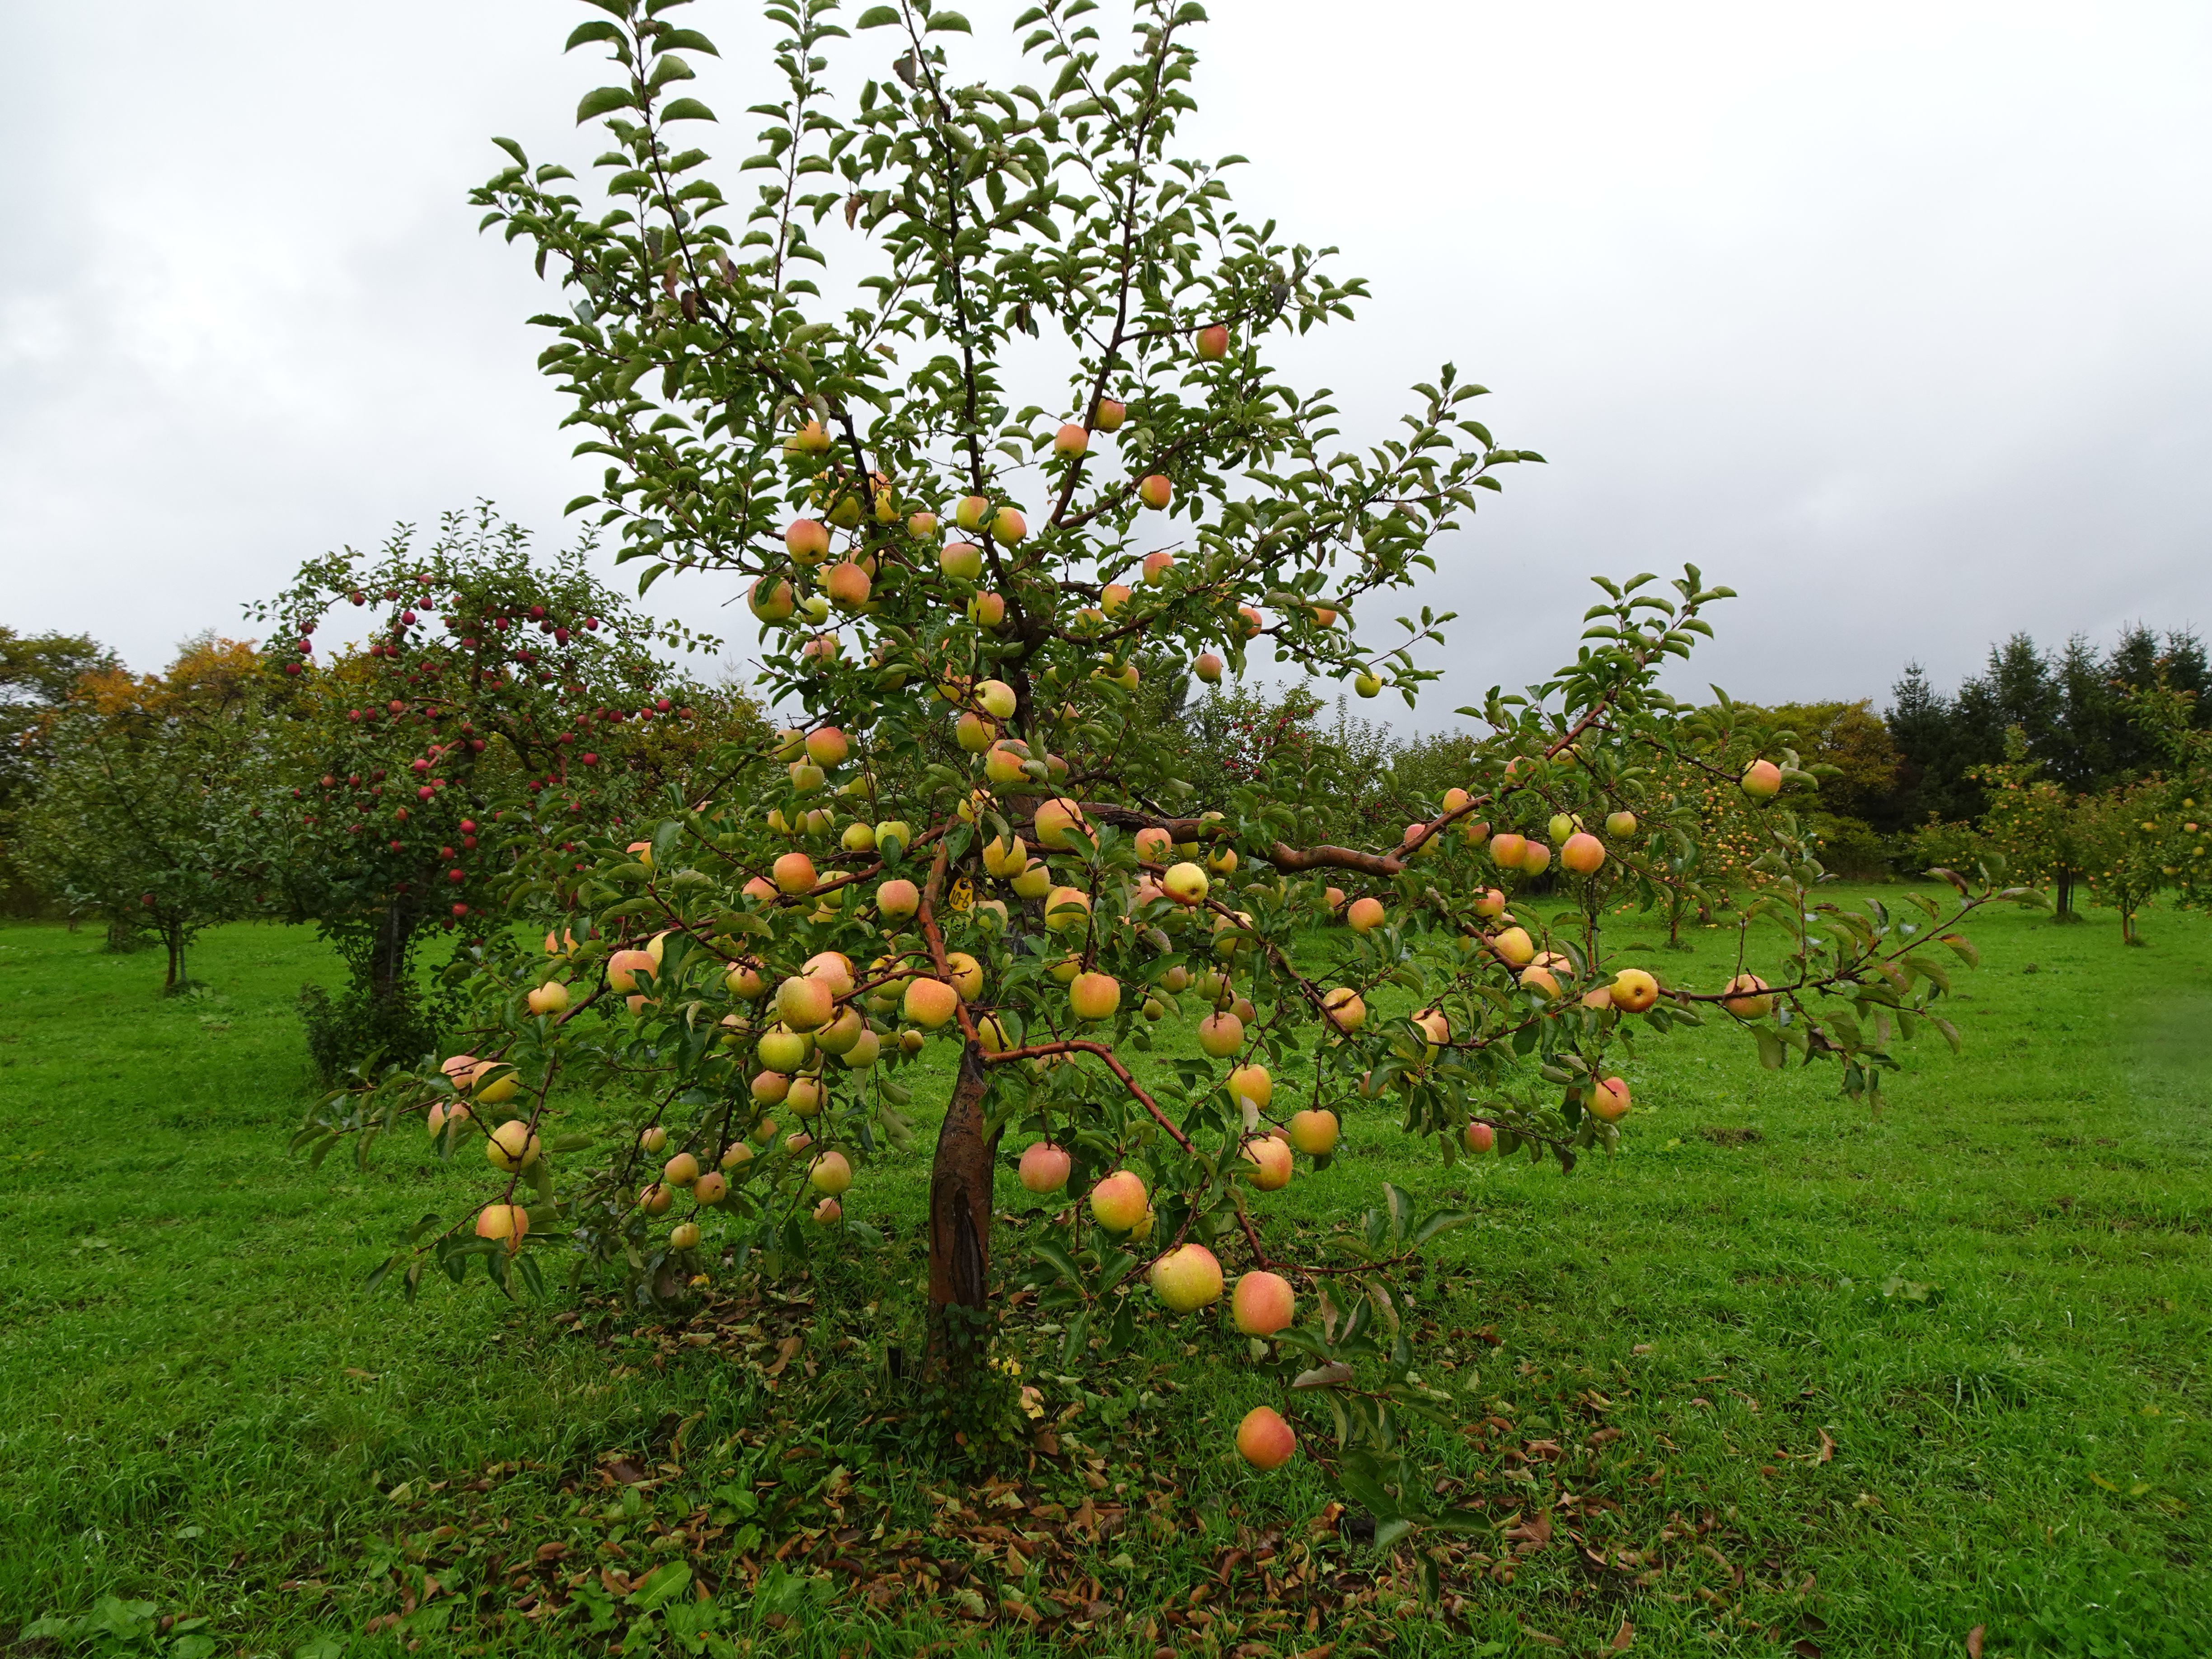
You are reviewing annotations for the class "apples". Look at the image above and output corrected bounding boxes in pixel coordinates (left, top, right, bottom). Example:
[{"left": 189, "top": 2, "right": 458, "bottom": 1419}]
[
  {"left": 907, "top": 512, "right": 938, "bottom": 537},
  {"left": 1404, "top": 823, "right": 1438, "bottom": 858},
  {"left": 1347, "top": 898, "right": 1385, "bottom": 936},
  {"left": 785, "top": 519, "right": 829, "bottom": 565},
  {"left": 1176, "top": 966, "right": 1195, "bottom": 989},
  {"left": 1213, "top": 911, "right": 1253, "bottom": 959},
  {"left": 1504, "top": 756, "right": 1536, "bottom": 783},
  {"left": 608, "top": 950, "right": 657, "bottom": 994},
  {"left": 1152, "top": 1244, "right": 1222, "bottom": 1316},
  {"left": 973, "top": 680, "right": 1016, "bottom": 717},
  {"left": 772, "top": 853, "right": 817, "bottom": 895},
  {"left": 840, "top": 1029, "right": 880, "bottom": 1069},
  {"left": 956, "top": 711, "right": 995, "bottom": 755},
  {"left": 1101, "top": 584, "right": 1132, "bottom": 620},
  {"left": 471, "top": 1061, "right": 519, "bottom": 1105},
  {"left": 1206, "top": 972, "right": 1232, "bottom": 998},
  {"left": 859, "top": 470, "right": 892, "bottom": 497},
  {"left": 1194, "top": 653, "right": 1222, "bottom": 684},
  {"left": 1309, "top": 607, "right": 1336, "bottom": 627},
  {"left": 626, "top": 842, "right": 656, "bottom": 871},
  {"left": 646, "top": 931, "right": 673, "bottom": 968},
  {"left": 626, "top": 994, "right": 661, "bottom": 1018},
  {"left": 874, "top": 489, "right": 901, "bottom": 520},
  {"left": 939, "top": 543, "right": 982, "bottom": 581},
  {"left": 747, "top": 575, "right": 796, "bottom": 623},
  {"left": 781, "top": 811, "right": 808, "bottom": 837},
  {"left": 1226, "top": 1063, "right": 1272, "bottom": 1112},
  {"left": 1141, "top": 475, "right": 1171, "bottom": 510},
  {"left": 439, "top": 1056, "right": 482, "bottom": 1093},
  {"left": 809, "top": 476, "right": 829, "bottom": 510},
  {"left": 1324, "top": 887, "right": 1346, "bottom": 916},
  {"left": 1069, "top": 971, "right": 1120, "bottom": 1022},
  {"left": 807, "top": 902, "right": 840, "bottom": 924},
  {"left": 1135, "top": 875, "right": 1166, "bottom": 906},
  {"left": 787, "top": 1077, "right": 829, "bottom": 1118},
  {"left": 839, "top": 549, "right": 876, "bottom": 581},
  {"left": 848, "top": 771, "right": 878, "bottom": 797},
  {"left": 742, "top": 875, "right": 780, "bottom": 912},
  {"left": 984, "top": 739, "right": 1032, "bottom": 785},
  {"left": 826, "top": 496, "right": 859, "bottom": 531},
  {"left": 983, "top": 835, "right": 1027, "bottom": 880},
  {"left": 1052, "top": 701, "right": 1078, "bottom": 730},
  {"left": 785, "top": 1133, "right": 813, "bottom": 1157},
  {"left": 694, "top": 801, "right": 725, "bottom": 823},
  {"left": 1229, "top": 998, "right": 1256, "bottom": 1027},
  {"left": 1200, "top": 812, "right": 1226, "bottom": 820},
  {"left": 904, "top": 977, "right": 957, "bottom": 1029},
  {"left": 818, "top": 872, "right": 857, "bottom": 909},
  {"left": 808, "top": 1151, "right": 852, "bottom": 1196},
  {"left": 783, "top": 438, "right": 806, "bottom": 468},
  {"left": 840, "top": 823, "right": 877, "bottom": 851},
  {"left": 1076, "top": 608, "right": 1104, "bottom": 637},
  {"left": 1585, "top": 1076, "right": 1631, "bottom": 1123},
  {"left": 693, "top": 1172, "right": 726, "bottom": 1208},
  {"left": 1162, "top": 862, "right": 1209, "bottom": 909},
  {"left": 968, "top": 590, "right": 1004, "bottom": 628},
  {"left": 1046, "top": 949, "right": 1084, "bottom": 983},
  {"left": 807, "top": 809, "right": 834, "bottom": 836},
  {"left": 1459, "top": 814, "right": 1490, "bottom": 847},
  {"left": 977, "top": 1011, "right": 1022, "bottom": 1053},
  {"left": 1521, "top": 840, "right": 1551, "bottom": 878},
  {"left": 1724, "top": 974, "right": 1773, "bottom": 1020},
  {"left": 1289, "top": 1109, "right": 1339, "bottom": 1156},
  {"left": 1442, "top": 788, "right": 1475, "bottom": 823},
  {"left": 1196, "top": 325, "right": 1229, "bottom": 361},
  {"left": 720, "top": 1014, "right": 759, "bottom": 1049},
  {"left": 801, "top": 951, "right": 857, "bottom": 1000},
  {"left": 1321, "top": 988, "right": 1366, "bottom": 1035},
  {"left": 721, "top": 1142, "right": 754, "bottom": 1175},
  {"left": 1198, "top": 1011, "right": 1244, "bottom": 1059},
  {"left": 1102, "top": 652, "right": 1130, "bottom": 678},
  {"left": 1551, "top": 744, "right": 1583, "bottom": 768},
  {"left": 1055, "top": 424, "right": 1088, "bottom": 460},
  {"left": 957, "top": 789, "right": 998, "bottom": 823},
  {"left": 773, "top": 729, "right": 806, "bottom": 763},
  {"left": 792, "top": 764, "right": 825, "bottom": 792},
  {"left": 1520, "top": 965, "right": 1561, "bottom": 998},
  {"left": 1561, "top": 833, "right": 1605, "bottom": 876},
  {"left": 776, "top": 976, "right": 833, "bottom": 1033},
  {"left": 751, "top": 1069, "right": 789, "bottom": 1109},
  {"left": 956, "top": 496, "right": 991, "bottom": 533},
  {"left": 1232, "top": 607, "right": 1262, "bottom": 640},
  {"left": 1045, "top": 754, "right": 1069, "bottom": 777},
  {"left": 805, "top": 727, "right": 848, "bottom": 768},
  {"left": 813, "top": 1004, "right": 862, "bottom": 1055},
  {"left": 1394, "top": 1021, "right": 1440, "bottom": 1065},
  {"left": 528, "top": 981, "right": 570, "bottom": 1019},
  {"left": 840, "top": 904, "right": 868, "bottom": 920},
  {"left": 1011, "top": 857, "right": 1050, "bottom": 900},
  {"left": 671, "top": 1222, "right": 701, "bottom": 1251},
  {"left": 1236, "top": 1405, "right": 1296, "bottom": 1474},
  {"left": 796, "top": 419, "right": 831, "bottom": 456},
  {"left": 428, "top": 1100, "right": 474, "bottom": 1134},
  {"left": 1034, "top": 1050, "right": 1075, "bottom": 1079},
  {"left": 813, "top": 1198, "right": 842, "bottom": 1225},
  {"left": 1018, "top": 1141, "right": 1071, "bottom": 1195},
  {"left": 1206, "top": 847, "right": 1238, "bottom": 879},
  {"left": 878, "top": 1025, "right": 901, "bottom": 1048},
  {"left": 878, "top": 879, "right": 920, "bottom": 923},
  {"left": 801, "top": 1047, "right": 822, "bottom": 1071},
  {"left": 1045, "top": 886, "right": 1091, "bottom": 932},
  {"left": 765, "top": 1000, "right": 780, "bottom": 1026},
  {"left": 1160, "top": 968, "right": 1186, "bottom": 995},
  {"left": 867, "top": 656, "right": 906, "bottom": 689},
  {"left": 801, "top": 596, "right": 828, "bottom": 626},
  {"left": 1354, "top": 672, "right": 1382, "bottom": 698},
  {"left": 1740, "top": 759, "right": 1781, "bottom": 798},
  {"left": 725, "top": 956, "right": 768, "bottom": 1000},
  {"left": 804, "top": 640, "right": 836, "bottom": 665},
  {"left": 1171, "top": 842, "right": 1199, "bottom": 859},
  {"left": 1242, "top": 1136, "right": 1293, "bottom": 1192},
  {"left": 1612, "top": 968, "right": 1658, "bottom": 1013},
  {"left": 1122, "top": 1200, "right": 1154, "bottom": 1244},
  {"left": 750, "top": 1119, "right": 778, "bottom": 1147},
  {"left": 837, "top": 785, "right": 850, "bottom": 796},
  {"left": 850, "top": 701, "right": 878, "bottom": 730},
  {"left": 1606, "top": 812, "right": 1636, "bottom": 842},
  {"left": 876, "top": 821, "right": 910, "bottom": 851},
  {"left": 861, "top": 583, "right": 883, "bottom": 614},
  {"left": 789, "top": 755, "right": 824, "bottom": 778},
  {"left": 1268, "top": 1126, "right": 1292, "bottom": 1147},
  {"left": 545, "top": 929, "right": 580, "bottom": 959},
  {"left": 1034, "top": 798, "right": 1083, "bottom": 848},
  {"left": 1091, "top": 1170, "right": 1147, "bottom": 1233},
  {"left": 1211, "top": 989, "right": 1238, "bottom": 1012},
  {"left": 827, "top": 563, "right": 870, "bottom": 612},
  {"left": 1530, "top": 951, "right": 1572, "bottom": 972},
  {"left": 1581, "top": 985, "right": 1616, "bottom": 1011},
  {"left": 1490, "top": 834, "right": 1527, "bottom": 869},
  {"left": 1493, "top": 927, "right": 1534, "bottom": 964},
  {"left": 1202, "top": 966, "right": 1217, "bottom": 986},
  {"left": 1093, "top": 398, "right": 1126, "bottom": 433},
  {"left": 1043, "top": 666, "right": 1070, "bottom": 693},
  {"left": 1358, "top": 1070, "right": 1386, "bottom": 1101},
  {"left": 758, "top": 1034, "right": 805, "bottom": 1073},
  {"left": 1411, "top": 1008, "right": 1450, "bottom": 1042},
  {"left": 813, "top": 632, "right": 840, "bottom": 648},
  {"left": 816, "top": 565, "right": 834, "bottom": 598},
  {"left": 872, "top": 993, "right": 898, "bottom": 1015},
  {"left": 1472, "top": 887, "right": 1505, "bottom": 923},
  {"left": 966, "top": 900, "right": 1008, "bottom": 940},
  {"left": 641, "top": 1127, "right": 667, "bottom": 1155},
  {"left": 767, "top": 809, "right": 783, "bottom": 832},
  {"left": 664, "top": 1153, "right": 699, "bottom": 1188},
  {"left": 486, "top": 1120, "right": 541, "bottom": 1174},
  {"left": 1206, "top": 901, "right": 1230, "bottom": 921},
  {"left": 1231, "top": 1270, "right": 1295, "bottom": 1340},
  {"left": 1115, "top": 667, "right": 1139, "bottom": 691},
  {"left": 1134, "top": 828, "right": 1172, "bottom": 862},
  {"left": 867, "top": 955, "right": 910, "bottom": 1001},
  {"left": 639, "top": 1183, "right": 672, "bottom": 1217},
  {"left": 1142, "top": 552, "right": 1174, "bottom": 589},
  {"left": 1464, "top": 1122, "right": 1493, "bottom": 1154},
  {"left": 934, "top": 953, "right": 983, "bottom": 1003},
  {"left": 767, "top": 1021, "right": 815, "bottom": 1063},
  {"left": 1196, "top": 977, "right": 1213, "bottom": 1001},
  {"left": 861, "top": 1015, "right": 870, "bottom": 1030},
  {"left": 476, "top": 1204, "right": 528, "bottom": 1253},
  {"left": 898, "top": 1030, "right": 924, "bottom": 1055},
  {"left": 748, "top": 1099, "right": 765, "bottom": 1120},
  {"left": 990, "top": 507, "right": 1027, "bottom": 547},
  {"left": 1548, "top": 811, "right": 1584, "bottom": 847}
]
